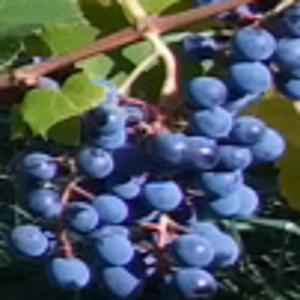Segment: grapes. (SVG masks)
Instances as JSON below:
<instances>
[{
    "label": "grapes",
    "instance_id": "grapes-1",
    "mask_svg": "<svg viewBox=\"0 0 300 300\" xmlns=\"http://www.w3.org/2000/svg\"><path fill=\"white\" fill-rule=\"evenodd\" d=\"M300 3L266 23L235 26L233 55L222 80L193 76L186 91L148 102L112 79L99 106L82 116L85 143L72 156L30 151L24 172L36 185L21 206L42 219L58 218L75 235L95 241L101 280L116 300L134 299L158 275L186 300H210L220 290L215 267L239 259L233 235L218 219L255 217L263 196L246 181L255 164L287 153L282 134L252 107L272 88L300 99Z\"/></svg>",
    "mask_w": 300,
    "mask_h": 300
},
{
    "label": "grapes",
    "instance_id": "grapes-2",
    "mask_svg": "<svg viewBox=\"0 0 300 300\" xmlns=\"http://www.w3.org/2000/svg\"><path fill=\"white\" fill-rule=\"evenodd\" d=\"M10 238L24 257L44 262V275L51 288L63 293H83L91 288L92 270L83 259L69 255L56 257L59 242L52 225H15Z\"/></svg>",
    "mask_w": 300,
    "mask_h": 300
},
{
    "label": "grapes",
    "instance_id": "grapes-3",
    "mask_svg": "<svg viewBox=\"0 0 300 300\" xmlns=\"http://www.w3.org/2000/svg\"><path fill=\"white\" fill-rule=\"evenodd\" d=\"M181 43L185 53L193 59L211 61L221 53V43L213 36L184 35Z\"/></svg>",
    "mask_w": 300,
    "mask_h": 300
}]
</instances>
